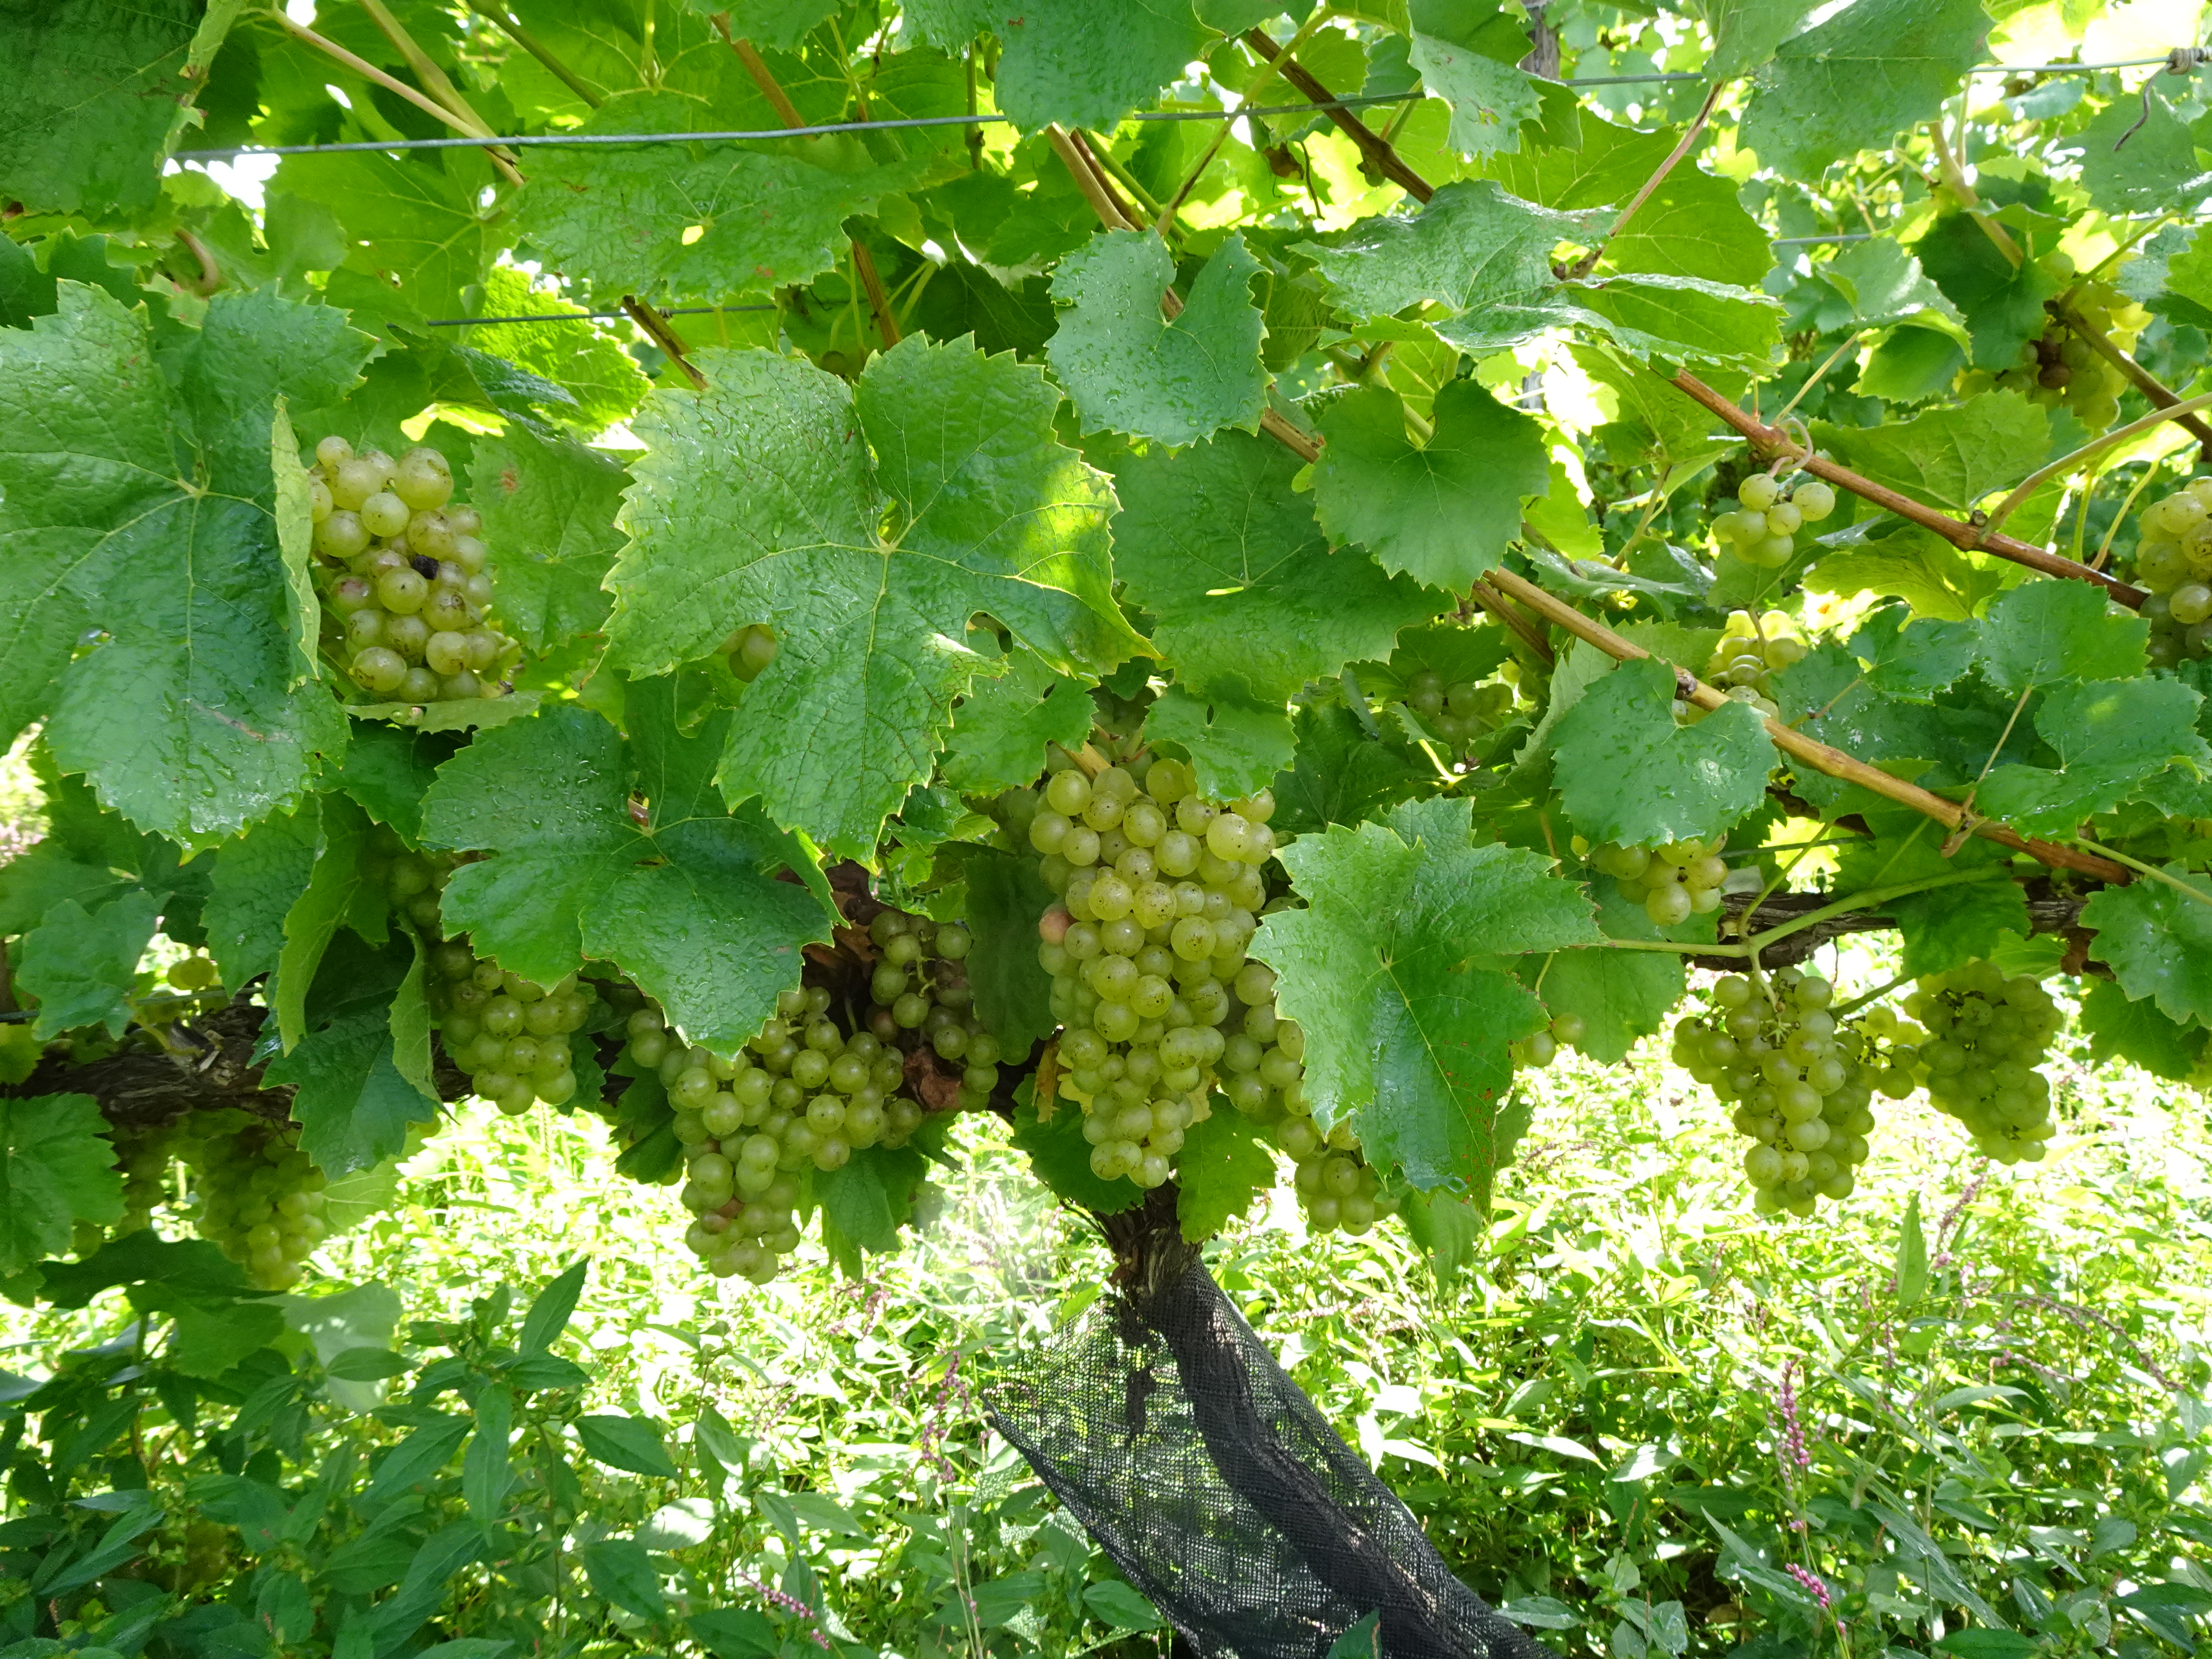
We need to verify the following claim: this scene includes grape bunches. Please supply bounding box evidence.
[69,1113,189,1257]
[713,623,779,683]
[1685,609,1810,726]
[143,956,230,1021]
[1903,961,2063,1165]
[362,822,590,1115]
[1002,757,1275,1188]
[1407,669,1513,764]
[2135,476,2212,670]
[1214,896,1401,1235]
[1570,827,1728,924]
[1510,1011,1586,1072]
[818,352,847,379]
[864,911,1031,1113]
[1713,473,1835,569]
[1958,248,2154,475]
[299,436,503,704]
[176,1109,327,1289]
[628,985,923,1284]
[968,610,1011,639]
[1671,965,1922,1216]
